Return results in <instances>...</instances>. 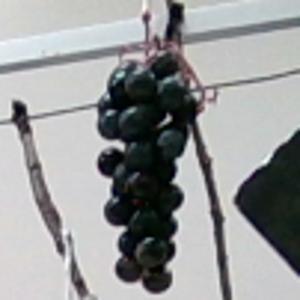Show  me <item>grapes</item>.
<instances>
[{"label": "grapes", "mask_w": 300, "mask_h": 300, "mask_svg": "<svg viewBox=\"0 0 300 300\" xmlns=\"http://www.w3.org/2000/svg\"><path fill=\"white\" fill-rule=\"evenodd\" d=\"M181 56L175 46L162 43L144 63L123 59L106 81L108 92L98 101L96 130L106 140H121L101 151L96 161L100 175L112 178L111 196L103 217L113 227L126 226L116 248L121 257L114 266L118 280H140L146 291L159 294L169 288L168 266L176 256L172 237L179 229L173 213L184 193L173 181L199 106L183 87Z\"/></svg>", "instance_id": "grapes-1"}]
</instances>
